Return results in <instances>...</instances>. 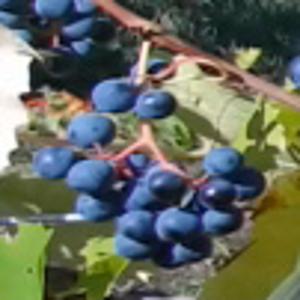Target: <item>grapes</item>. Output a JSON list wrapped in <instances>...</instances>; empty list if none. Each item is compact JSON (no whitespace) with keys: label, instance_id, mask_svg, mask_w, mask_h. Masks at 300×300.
Wrapping results in <instances>:
<instances>
[{"label":"grapes","instance_id":"2","mask_svg":"<svg viewBox=\"0 0 300 300\" xmlns=\"http://www.w3.org/2000/svg\"><path fill=\"white\" fill-rule=\"evenodd\" d=\"M98 6L91 0H32L31 26L43 30L51 21H60L56 49L64 55L87 58L97 49L92 36L99 23Z\"/></svg>","mask_w":300,"mask_h":300},{"label":"grapes","instance_id":"1","mask_svg":"<svg viewBox=\"0 0 300 300\" xmlns=\"http://www.w3.org/2000/svg\"><path fill=\"white\" fill-rule=\"evenodd\" d=\"M137 64L125 75L100 77L90 89L95 110H82L66 125L69 146H45L33 156L35 174L62 180L78 194L74 210L87 224L113 220L111 241L127 262L152 263L163 269L194 264L211 255L214 238L237 233L245 224L243 210L232 205L259 198L267 179L246 164L233 147H216L202 158L203 171L185 176L165 168L159 158L131 153L125 166L110 159L80 160L77 150L102 149L119 134L109 114L131 111L138 120H169L177 111L171 90L143 93L133 83Z\"/></svg>","mask_w":300,"mask_h":300},{"label":"grapes","instance_id":"3","mask_svg":"<svg viewBox=\"0 0 300 300\" xmlns=\"http://www.w3.org/2000/svg\"><path fill=\"white\" fill-rule=\"evenodd\" d=\"M14 5V0H0V22L8 29L12 30L22 41L29 42L33 38L32 30L20 21V16L16 12H10Z\"/></svg>","mask_w":300,"mask_h":300},{"label":"grapes","instance_id":"5","mask_svg":"<svg viewBox=\"0 0 300 300\" xmlns=\"http://www.w3.org/2000/svg\"><path fill=\"white\" fill-rule=\"evenodd\" d=\"M170 61L165 58H150L146 66V74L148 76H156L167 70Z\"/></svg>","mask_w":300,"mask_h":300},{"label":"grapes","instance_id":"4","mask_svg":"<svg viewBox=\"0 0 300 300\" xmlns=\"http://www.w3.org/2000/svg\"><path fill=\"white\" fill-rule=\"evenodd\" d=\"M286 79L294 89L300 90V53L290 57L286 68Z\"/></svg>","mask_w":300,"mask_h":300}]
</instances>
